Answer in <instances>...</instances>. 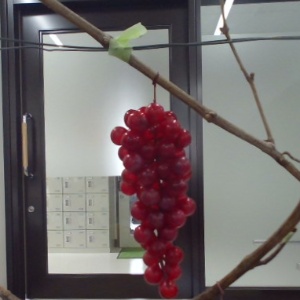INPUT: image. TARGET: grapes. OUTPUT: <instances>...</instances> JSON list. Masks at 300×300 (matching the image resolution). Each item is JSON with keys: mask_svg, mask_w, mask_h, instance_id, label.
Masks as SVG:
<instances>
[{"mask_svg": "<svg viewBox=\"0 0 300 300\" xmlns=\"http://www.w3.org/2000/svg\"><path fill=\"white\" fill-rule=\"evenodd\" d=\"M123 123L126 128H111L110 139L121 146L118 156L124 169L119 190L127 196L136 194L139 200L131 206V215L141 221L133 236L146 250L144 278L159 287L162 298L177 299L175 282L181 277L183 251L173 243L185 227V217L197 210L186 195L192 171L185 148L192 137L178 115L162 104L129 109Z\"/></svg>", "mask_w": 300, "mask_h": 300, "instance_id": "01657485", "label": "grapes"}]
</instances>
